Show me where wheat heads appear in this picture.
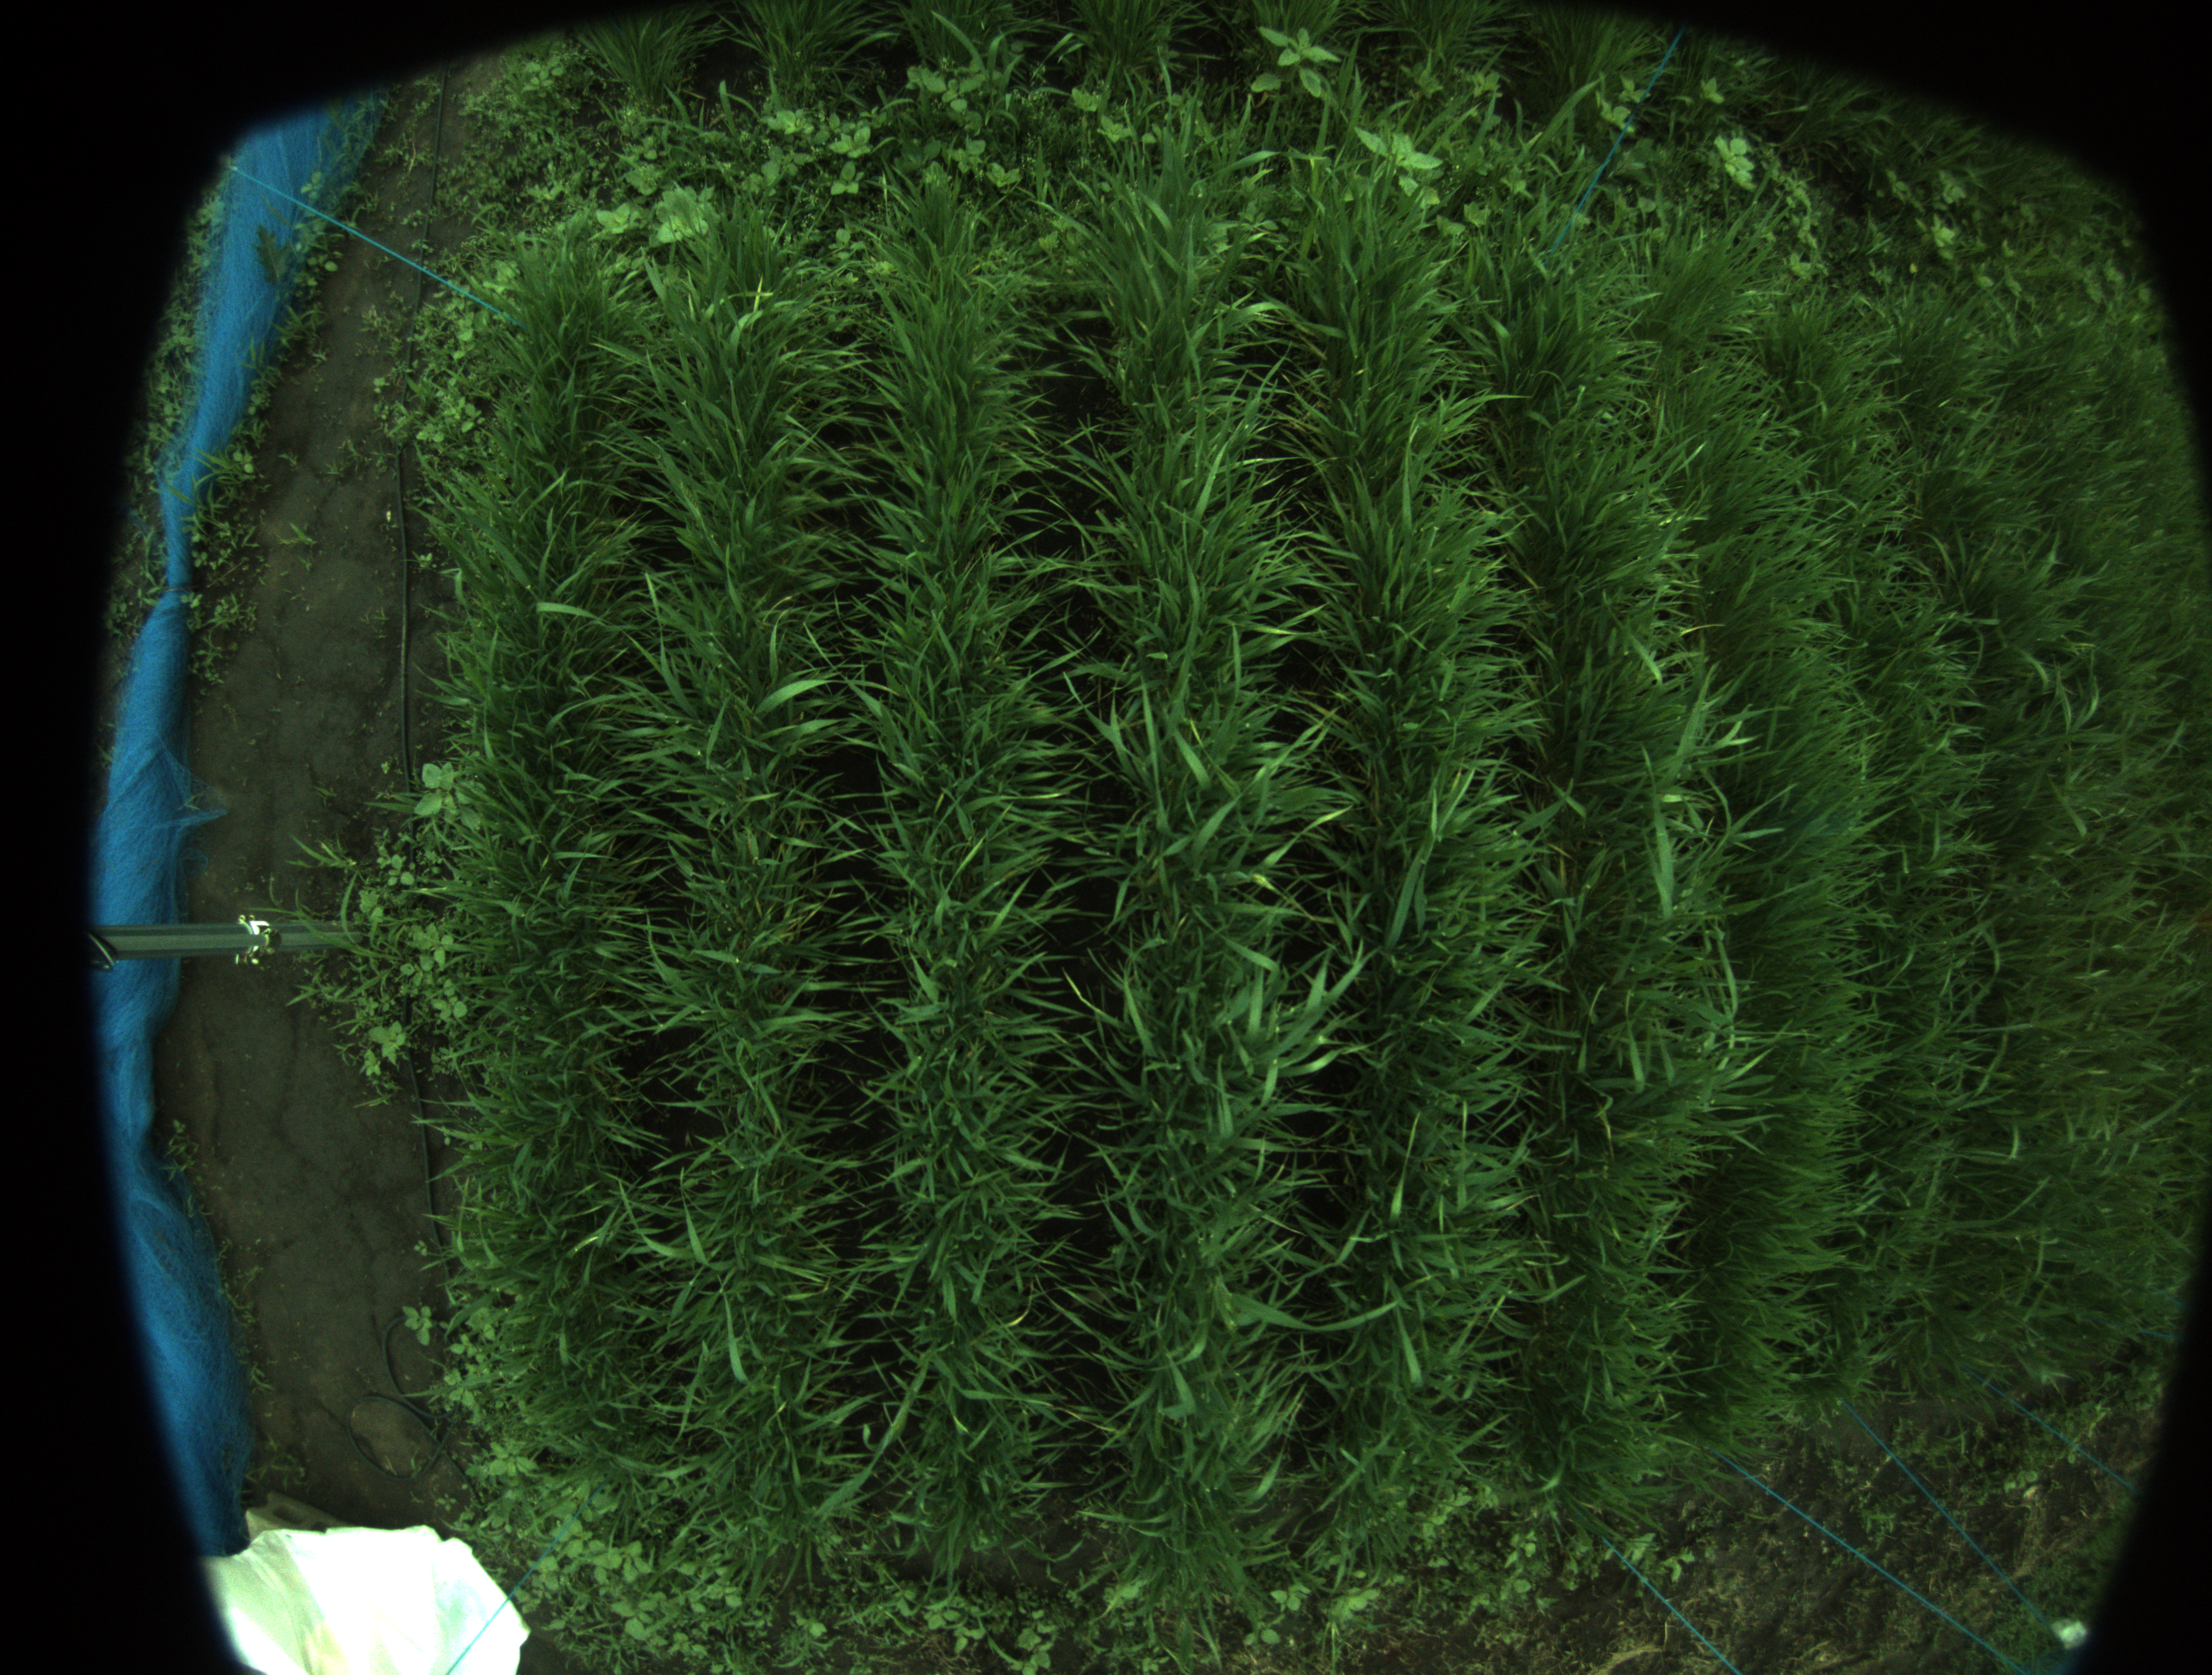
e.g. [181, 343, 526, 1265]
[1255, 1378, 1270, 1410]
[681, 484, 700, 510]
